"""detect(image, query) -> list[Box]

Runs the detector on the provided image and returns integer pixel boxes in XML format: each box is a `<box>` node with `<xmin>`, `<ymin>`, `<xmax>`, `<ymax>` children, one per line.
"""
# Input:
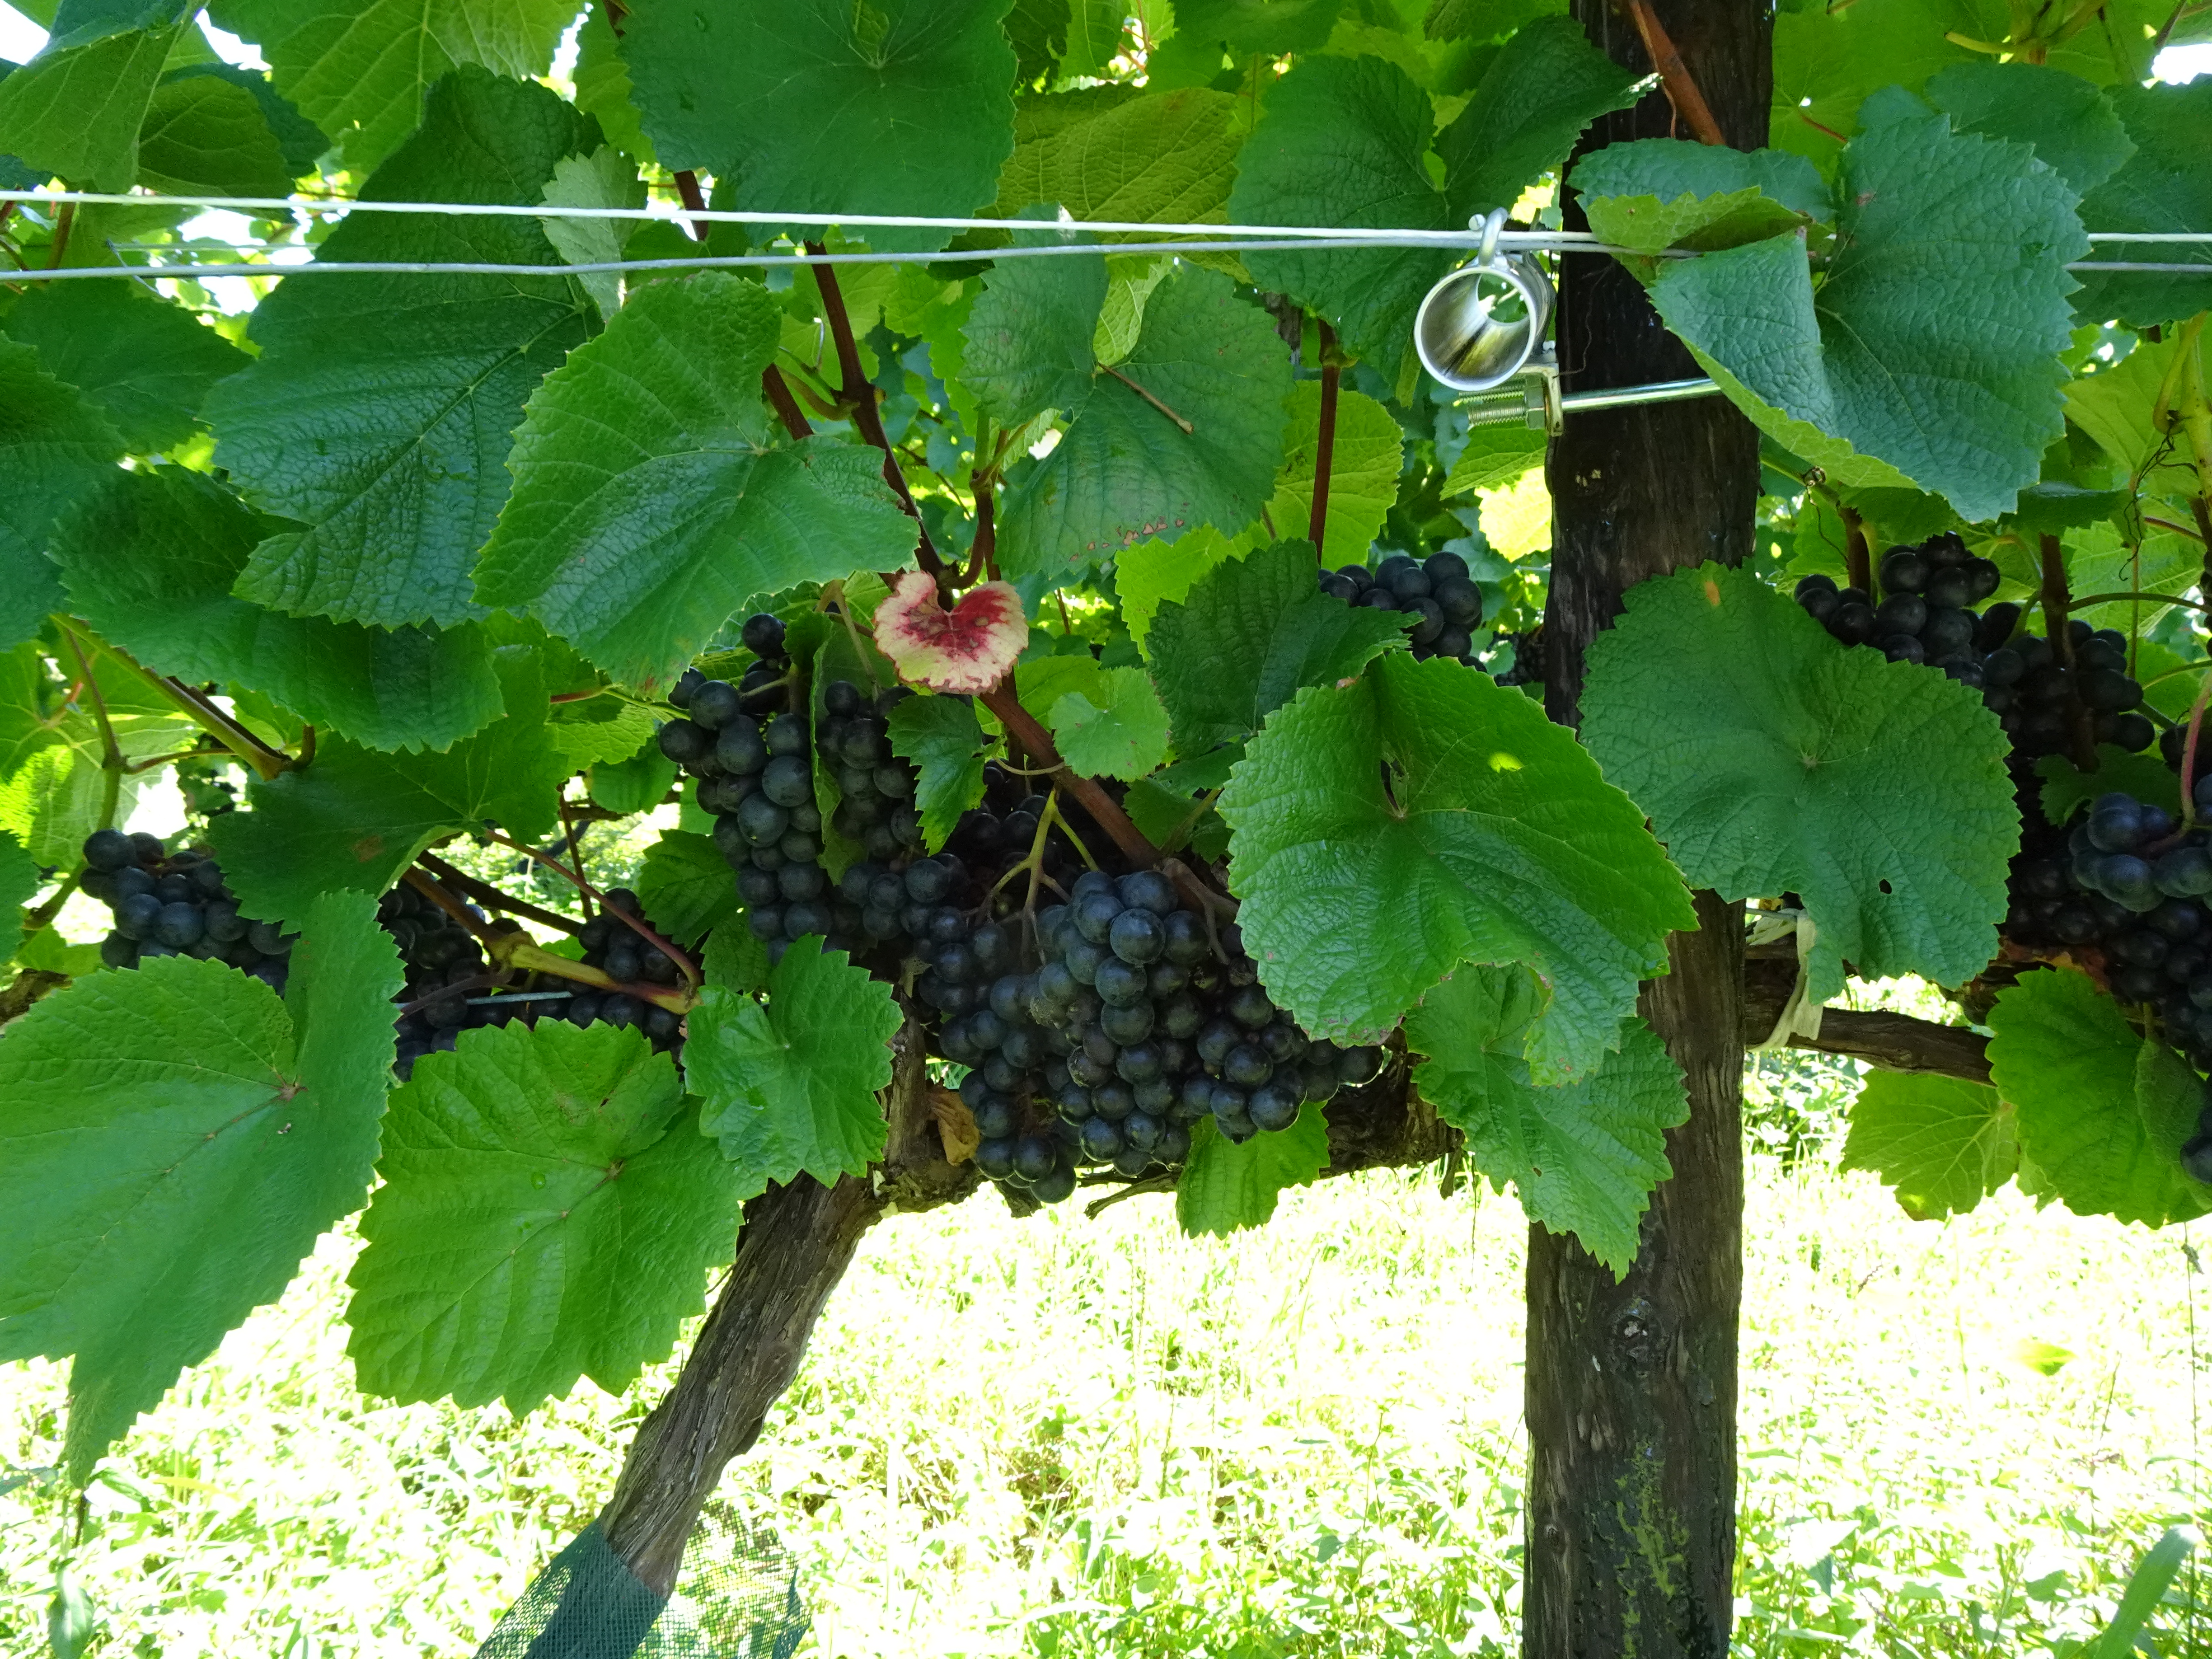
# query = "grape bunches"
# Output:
<box><xmin>1298</xmin><ymin>1038</ymin><xmax>1382</xmax><ymax>1103</ymax></box>
<box><xmin>374</xmin><ymin>871</ymin><xmax>569</xmax><ymax>1082</ymax></box>
<box><xmin>2182</xmin><ymin>1076</ymin><xmax>2212</xmax><ymax>1186</ymax></box>
<box><xmin>565</xmin><ymin>886</ymin><xmax>710</xmax><ymax>1069</ymax></box>
<box><xmin>815</xmin><ymin>682</ymin><xmax>965</xmax><ymax>939</ymax></box>
<box><xmin>1182</xmin><ymin>923</ymin><xmax>1309</xmax><ymax>1145</ymax></box>
<box><xmin>1030</xmin><ymin>870</ymin><xmax>1229</xmax><ymax>1178</ymax></box>
<box><xmin>2069</xmin><ymin>775</ymin><xmax>2212</xmax><ymax>912</ymax></box>
<box><xmin>1982</xmin><ymin>620</ymin><xmax>2154</xmax><ymax>773</ymax></box>
<box><xmin>966</xmin><ymin>759</ymin><xmax>1098</xmax><ymax>896</ymax></box>
<box><xmin>2000</xmin><ymin>857</ymin><xmax>2122</xmax><ymax>943</ymax></box>
<box><xmin>2098</xmin><ymin>893</ymin><xmax>2212</xmax><ymax>1075</ymax></box>
<box><xmin>1794</xmin><ymin>532</ymin><xmax>2005</xmax><ymax>686</ymax></box>
<box><xmin>1959</xmin><ymin>602</ymin><xmax>2021</xmax><ymax>652</ymax></box>
<box><xmin>80</xmin><ymin>829</ymin><xmax>301</xmax><ymax>995</ymax></box>
<box><xmin>914</xmin><ymin>905</ymin><xmax>1083</xmax><ymax>1205</ymax></box>
<box><xmin>1317</xmin><ymin>551</ymin><xmax>1488</xmax><ymax>673</ymax></box>
<box><xmin>658</xmin><ymin>614</ymin><xmax>860</xmax><ymax>967</ymax></box>
<box><xmin>2159</xmin><ymin>721</ymin><xmax>2206</xmax><ymax>782</ymax></box>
